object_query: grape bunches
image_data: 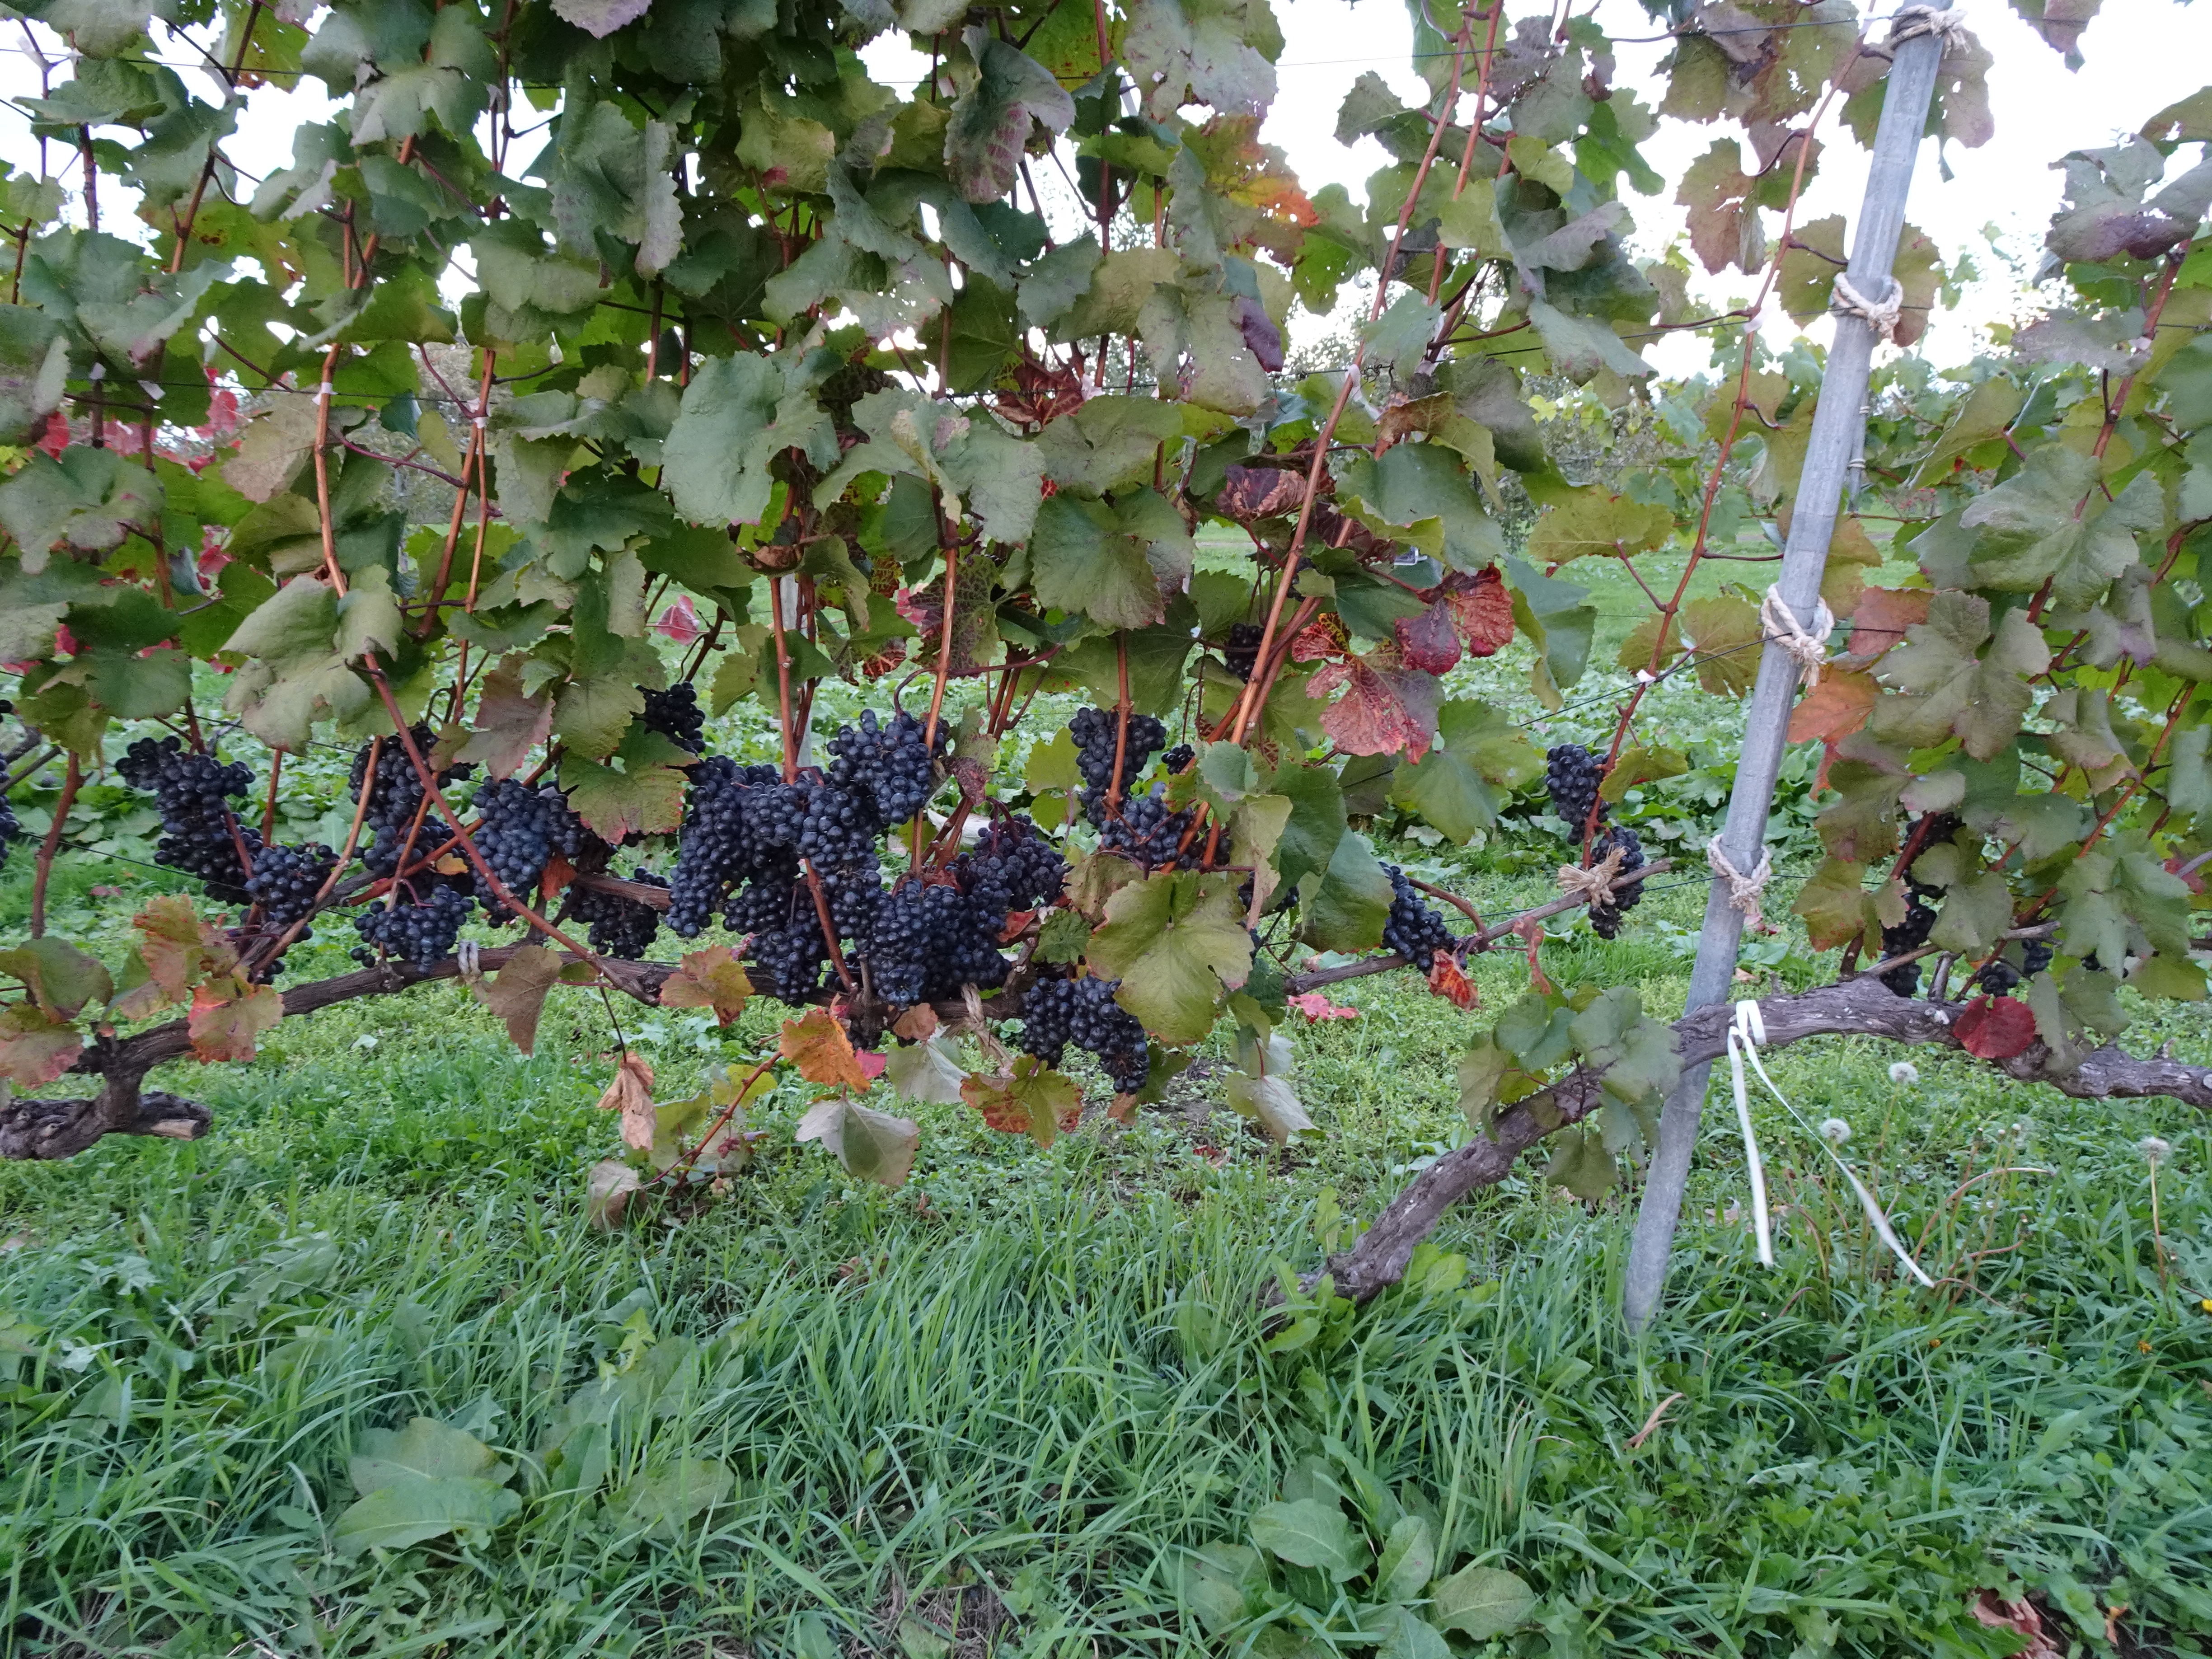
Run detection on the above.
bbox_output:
[974,807,1036,863]
[1583,828,1649,941]
[942,929,1016,992]
[668,756,783,941]
[980,550,1011,582]
[229,934,289,1000]
[469,779,584,933]
[2019,932,2099,980]
[115,734,183,793]
[1221,616,1284,683]
[1235,852,1307,920]
[348,885,476,987]
[1017,977,1076,1066]
[1158,743,1202,794]
[1001,835,1070,910]
[737,895,828,1010]
[935,849,1009,934]
[562,864,674,968]
[1965,952,2025,1005]
[1896,807,1971,906]
[828,948,893,1054]
[1875,888,1938,1000]
[144,835,267,912]
[1353,858,1474,983]
[1067,974,1157,1098]
[1539,742,1616,847]
[1066,700,1167,836]
[151,755,258,849]
[627,676,709,761]
[1,755,28,867]
[1281,551,1315,603]
[348,723,469,880]
[1106,797,1237,869]
[864,880,946,1011]
[739,768,823,870]
[825,706,959,831]
[812,786,882,942]
[251,837,343,943]
[721,856,801,944]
